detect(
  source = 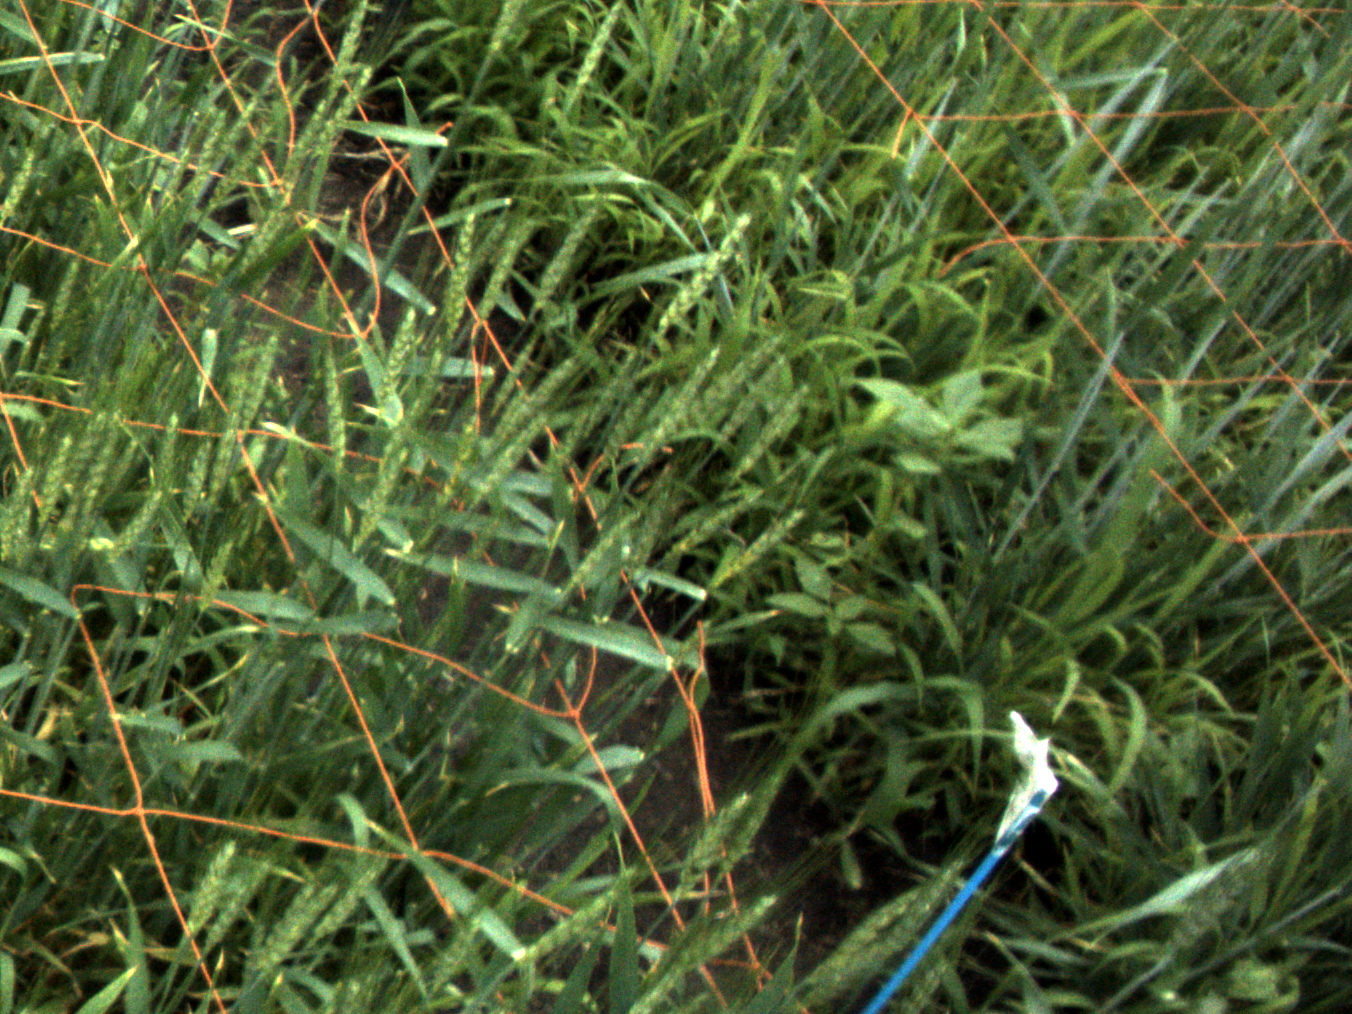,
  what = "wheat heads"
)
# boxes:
[716,792,772,874]
[45,340,66,373]
[673,895,775,979]
[104,491,162,564]
[496,352,577,441]
[583,350,636,439]
[35,432,72,526]
[576,0,624,87]
[206,410,240,503]
[803,884,923,985]
[14,506,33,563]
[382,398,420,457]
[659,215,752,331]
[311,65,372,159]
[152,412,181,485]
[441,212,475,342]
[193,130,225,196]
[470,222,507,272]
[99,439,136,493]
[534,208,596,306]
[564,510,640,591]
[337,970,372,1014]
[735,385,808,477]
[859,858,965,981]
[608,966,682,1014]
[629,492,670,577]
[717,510,803,584]
[442,421,477,501]
[81,412,121,516]
[477,217,532,322]
[640,346,721,465]
[489,390,525,443]
[212,97,260,159]
[280,99,326,182]
[669,793,753,904]
[353,447,408,553]
[28,311,44,338]
[489,0,543,54]
[0,469,34,563]
[263,883,313,953]
[322,355,347,467]
[260,884,337,974]
[600,388,652,469]
[0,148,34,219]
[240,920,268,988]
[211,0,231,29]
[168,145,192,196]
[456,996,514,1014]
[409,348,444,417]
[183,842,236,936]
[48,259,77,330]
[432,915,480,990]
[179,440,212,519]
[308,870,378,943]
[624,990,707,1014]
[207,126,274,212]
[241,334,280,426]
[1163,871,1249,954]
[326,0,368,101]
[196,539,231,611]
[797,943,883,1013]
[205,864,268,948]
[582,480,614,513]
[663,488,762,562]
[872,962,949,1014]
[523,890,616,962]
[255,214,290,257]
[477,415,549,496]
[696,329,788,424]
[380,304,418,403]
[239,211,279,272]
[665,373,726,436]
[555,410,589,460]
[718,359,788,451]
[65,412,106,483]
